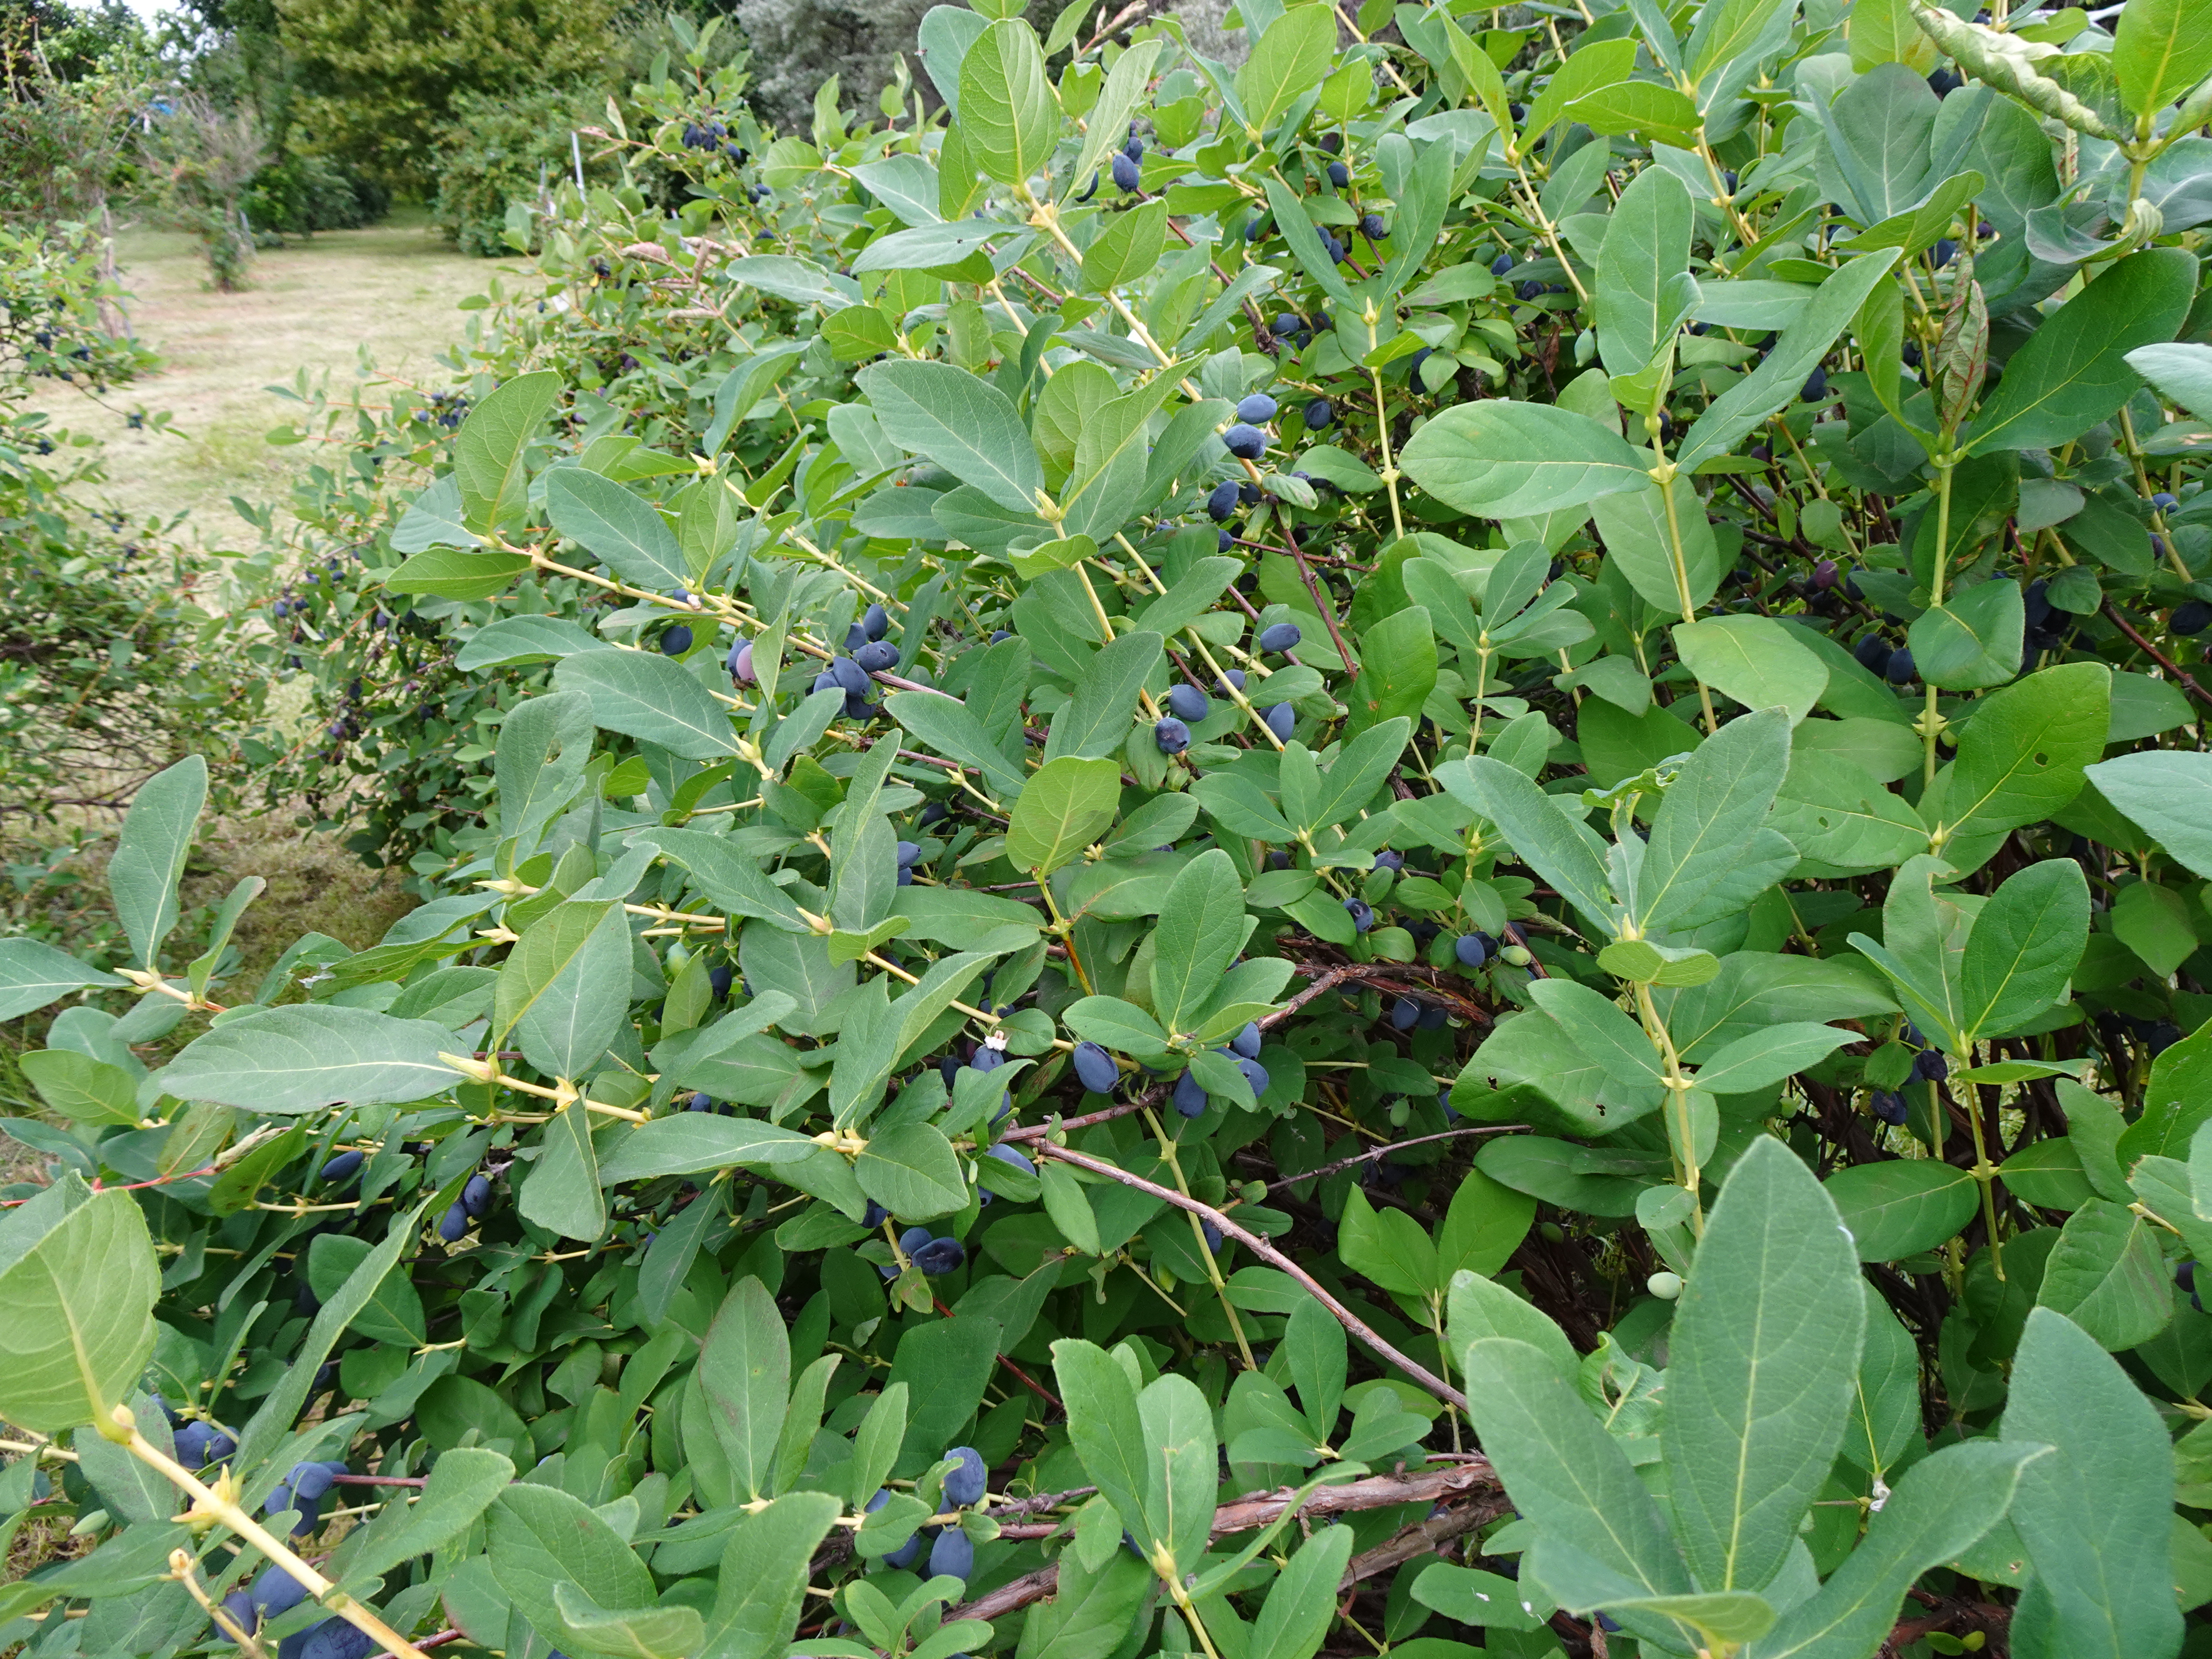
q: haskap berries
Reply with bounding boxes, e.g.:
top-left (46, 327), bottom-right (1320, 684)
top-left (1887, 648), bottom-right (1914, 685)
top-left (353, 551), bottom-right (358, 558)
top-left (1144, 565), bottom-right (1163, 583)
top-left (115, 513), bottom-right (124, 522)
top-left (2067, 634), bottom-right (2097, 652)
top-left (1940, 73), bottom-right (1967, 98)
top-left (315, 792), bottom-right (322, 801)
top-left (128, 549), bottom-right (135, 557)
top-left (1359, 209), bottom-right (1389, 239)
top-left (1815, 558), bottom-right (1839, 588)
top-left (1783, 555), bottom-right (1787, 565)
top-left (2134, 1021), bottom-right (2157, 1042)
top-left (2175, 1259), bottom-right (2195, 1292)
top-left (1533, 140), bottom-right (1545, 151)
top-left (1845, 565), bottom-right (1868, 601)
top-left (1265, 495), bottom-right (1279, 506)
top-left (1804, 576), bottom-right (1819, 594)
top-left (1767, 438), bottom-right (1786, 458)
top-left (1756, 331), bottom-right (1775, 351)
top-left (948, 788), bottom-right (966, 800)
top-left (1312, 311), bottom-right (1330, 333)
top-left (98, 384), bottom-right (106, 393)
top-left (1871, 1089), bottom-right (1908, 1124)
top-left (2069, 836), bottom-right (2090, 855)
top-left (1775, 548), bottom-right (1785, 554)
top-left (1441, 1088), bottom-right (1460, 1120)
top-left (1360, 451), bottom-right (1370, 460)
top-left (388, 1209), bottom-right (408, 1235)
top-left (1976, 222), bottom-right (1994, 239)
top-left (333, 573), bottom-right (342, 580)
top-left (852, 641), bottom-right (900, 671)
top-left (1422, 1003), bottom-right (1449, 1029)
top-left (1192, 1350), bottom-right (1207, 1371)
top-left (172, 1429), bottom-right (202, 1470)
top-left (756, 183), bottom-right (771, 195)
top-left (1272, 338), bottom-right (1296, 356)
top-left (420, 662), bottom-right (426, 668)
top-left (1918, 235), bottom-right (1956, 271)
top-left (455, 400), bottom-right (465, 407)
top-left (347, 723), bottom-right (359, 736)
top-left (690, 126), bottom-right (702, 145)
top-left (1291, 471), bottom-right (1310, 479)
top-left (864, 604), bottom-right (888, 642)
top-left (1113, 1075), bottom-right (1139, 1101)
top-left (1402, 917), bottom-right (1441, 953)
top-left (1235, 1021), bottom-right (1261, 1059)
top-left (1303, 396), bottom-right (1336, 428)
top-left (1073, 1040), bottom-right (1120, 1091)
top-left (914, 1233), bottom-right (966, 1275)
top-left (838, 1623), bottom-right (848, 1635)
top-left (973, 208), bottom-right (984, 218)
top-left (1245, 218), bottom-right (1267, 241)
top-left (966, 1040), bottom-right (975, 1058)
top-left (2150, 533), bottom-right (2165, 558)
top-left (987, 1144), bottom-right (1037, 1176)
top-left (1751, 446), bottom-right (1767, 460)
top-left (894, 842), bottom-right (922, 868)
top-left (689, 1092), bottom-right (709, 1111)
top-left (1920, 369), bottom-right (1926, 387)
top-left (1298, 331), bottom-right (1312, 350)
top-left (858, 972), bottom-right (870, 984)
top-left (80, 347), bottom-right (90, 353)
top-left (1238, 570), bottom-right (1258, 598)
top-left (420, 416), bottom-right (427, 421)
top-left (2134, 737), bottom-right (2158, 751)
top-left (1975, 15), bottom-right (1989, 24)
top-left (1213, 1046), bottom-right (1268, 1097)
top-left (215, 1589), bottom-right (256, 1643)
top-left (401, 1142), bottom-right (421, 1156)
top-left (64, 374), bottom-right (72, 380)
top-left (1207, 481), bottom-right (1239, 520)
top-left (40, 440), bottom-right (49, 445)
top-left (539, 304), bottom-right (544, 312)
top-left (1141, 1066), bottom-right (1163, 1075)
top-left (614, 280), bottom-right (621, 289)
top-left (151, 1396), bottom-right (170, 1422)
top-left (884, 774), bottom-right (891, 785)
top-left (365, 711), bottom-right (372, 717)
top-left (1155, 523), bottom-right (1176, 533)
top-left (291, 630), bottom-right (302, 642)
top-left (1316, 566), bottom-right (1333, 591)
top-left (43, 340), bottom-right (51, 350)
top-left (70, 258), bottom-right (75, 263)
top-left (43, 448), bottom-right (49, 455)
top-left (621, 355), bottom-right (629, 362)
top-left (1421, 714), bottom-right (1434, 730)
top-left (1332, 573), bottom-right (1353, 613)
top-left (1392, 995), bottom-right (1423, 1030)
top-left (377, 612), bottom-right (388, 626)
top-left (575, 414), bottom-right (583, 423)
top-left (712, 965), bottom-right (732, 998)
top-left (2169, 594), bottom-right (2209, 638)
top-left (1538, 1222), bottom-right (1564, 1245)
top-left (1325, 160), bottom-right (1353, 189)
top-left (473, 1125), bottom-right (488, 1132)
top-left (949, 804), bottom-right (963, 823)
top-left (1532, 309), bottom-right (1552, 326)
top-left (943, 1058), bottom-right (966, 1086)
top-left (2149, 1026), bottom-right (2178, 1054)
top-left (1647, 1272), bottom-right (1682, 1299)
top-left (312, 1364), bottom-right (332, 1387)
top-left (861, 1198), bottom-right (889, 1233)
top-left (1390, 1096), bottom-right (1409, 1127)
top-left (289, 1464), bottom-right (331, 1497)
top-left (983, 975), bottom-right (994, 992)
top-left (1855, 632), bottom-right (1880, 663)
top-left (2021, 580), bottom-right (2049, 628)
top-left (1270, 850), bottom-right (1292, 869)
top-left (399, 1221), bottom-right (426, 1259)
top-left (868, 352), bottom-right (886, 361)
top-left (301, 1286), bottom-right (319, 1311)
top-left (971, 1045), bottom-right (1003, 1069)
top-left (32, 569), bottom-right (39, 576)
top-left (8, 301), bottom-right (18, 306)
top-left (137, 421), bottom-right (143, 430)
top-left (583, 608), bottom-right (590, 612)
top-left (737, 641), bottom-right (757, 683)
top-left (974, 1186), bottom-right (994, 1208)
top-left (45, 324), bottom-right (59, 335)
top-left (725, 142), bottom-right (740, 156)
top-left (1268, 216), bottom-right (1282, 236)
top-left (1499, 921), bottom-right (1530, 945)
top-left (743, 980), bottom-right (752, 996)
top-left (683, 133), bottom-right (691, 148)
top-left (113, 526), bottom-right (117, 534)
top-left (612, 373), bottom-right (619, 378)
top-left (1260, 623), bottom-right (1300, 650)
top-left (611, 606), bottom-right (617, 611)
top-left (1239, 483), bottom-right (1262, 506)
top-left (931, 1526), bottom-right (973, 1580)
top-left (1202, 1220), bottom-right (1223, 1251)
top-left (277, 610), bottom-right (286, 617)
top-left (1345, 897), bottom-right (1374, 932)
top-left (1549, 284), bottom-right (1566, 296)
top-left (715, 126), bottom-right (724, 136)
top-left (549, 1650), bottom-right (569, 1659)
top-left (654, 1006), bottom-right (663, 1021)
top-left (1917, 1048), bottom-right (1947, 1082)
top-left (1361, 1159), bottom-right (1378, 1186)
top-left (334, 752), bottom-right (342, 764)
top-left (25, 351), bottom-right (31, 360)
top-left (325, 1461), bottom-right (352, 1484)
top-left (1023, 736), bottom-right (1041, 749)
top-left (439, 415), bottom-right (449, 425)
top-left (748, 191), bottom-right (760, 204)
top-left (464, 1176), bottom-right (493, 1214)
top-left (923, 1494), bottom-right (954, 1536)
top-left (277, 1620), bottom-right (323, 1658)
top-left (440, 1203), bottom-right (466, 1241)
top-left (950, 1653), bottom-right (971, 1659)
top-left (1235, 390), bottom-right (1281, 422)
top-left (1522, 278), bottom-right (1547, 299)
top-left (2098, 1013), bottom-right (2126, 1033)
top-left (1499, 945), bottom-right (1531, 966)
top-left (1113, 155), bottom-right (1139, 192)
top-left (1335, 487), bottom-right (1349, 495)
top-left (863, 1490), bottom-right (891, 1513)
top-left (1510, 105), bottom-right (1525, 120)
top-left (265, 1485), bottom-right (290, 1516)
top-left (1312, 223), bottom-right (1332, 253)
top-left (1128, 122), bottom-right (1137, 137)
top-left (1409, 371), bottom-right (1427, 394)
top-left (2042, 612), bottom-right (2070, 631)
top-left (434, 396), bottom-right (443, 400)
top-left (679, 351), bottom-right (686, 361)
top-left (48, 301), bottom-right (62, 312)
top-left (1315, 1220), bottom-right (1335, 1238)
top-left (645, 1224), bottom-right (666, 1244)
top-left (209, 1426), bottom-right (236, 1466)
top-left (1548, 563), bottom-right (1562, 582)
top-left (717, 1102), bottom-right (733, 1116)
top-left (1134, 156), bottom-right (1143, 167)
top-left (1173, 1071), bottom-right (1207, 1117)
top-left (597, 266), bottom-right (610, 276)
top-left (1917, 351), bottom-right (1922, 367)
top-left (1869, 648), bottom-right (1894, 678)
top-left (898, 866), bottom-right (912, 888)
top-left (306, 795), bottom-right (312, 803)
top-left (1510, 290), bottom-right (1525, 315)
top-left (2001, 517), bottom-right (2019, 552)
top-left (1150, 1253), bottom-right (1167, 1291)
top-left (882, 1534), bottom-right (921, 1568)
top-left (1900, 1064), bottom-right (1918, 1085)
top-left (319, 750), bottom-right (326, 756)
top-left (992, 629), bottom-right (1011, 646)
top-left (1410, 414), bottom-right (1428, 435)
top-left (835, 697), bottom-right (846, 716)
top-left (1883, 610), bottom-right (1905, 627)
top-left (1810, 592), bottom-right (1839, 609)
top-left (1722, 571), bottom-right (1752, 583)
top-left (877, 1256), bottom-right (905, 1280)
top-left (1370, 845), bottom-right (1405, 871)
top-left (667, 942), bottom-right (691, 978)
top-left (1510, 354), bottom-right (1531, 373)
top-left (846, 696), bottom-right (878, 719)
top-left (55, 298), bottom-right (66, 306)
top-left (114, 574), bottom-right (118, 580)
top-left (2029, 630), bottom-right (2060, 647)
top-left (1356, 539), bottom-right (1377, 560)
top-left (990, 1090), bottom-right (1011, 1126)
top-left (69, 1508), bottom-right (108, 1536)
top-left (46, 370), bottom-right (51, 378)
top-left (1255, 1355), bottom-right (1268, 1362)
top-left (307, 1218), bottom-right (347, 1242)
top-left (35, 333), bottom-right (52, 341)
top-left (1940, 729), bottom-right (1957, 746)
top-left (1157, 1263), bottom-right (1177, 1293)
top-left (36, 371), bottom-right (41, 375)
top-left (2021, 632), bottom-right (2035, 672)
top-left (1646, 413), bottom-right (1675, 448)
top-left (1773, 558), bottom-right (1783, 569)
top-left (1692, 322), bottom-right (1711, 335)
top-left (328, 723), bottom-right (345, 739)
top-left (1903, 344), bottom-right (1919, 366)
top-left (813, 671), bottom-right (839, 692)
top-left (626, 426), bottom-right (638, 434)
top-left (1595, 1612), bottom-right (1620, 1631)
top-left (625, 359), bottom-right (634, 368)
top-left (406, 610), bottom-right (415, 621)
top-left (72, 353), bottom-right (78, 359)
top-left (1270, 311), bottom-right (1304, 336)
top-left (1293, 526), bottom-right (1308, 546)
top-left (1215, 669), bottom-right (1245, 691)
top-left (1472, 932), bottom-right (1499, 958)
top-left (1338, 981), bottom-right (1361, 995)
top-left (1497, 1553), bottom-right (1523, 1576)
top-left (917, 802), bottom-right (948, 826)
top-left (880, 953), bottom-right (906, 967)
top-left (420, 705), bottom-right (432, 716)
top-left (1323, 544), bottom-right (1332, 556)
top-left (1574, 328), bottom-right (1595, 367)
top-left (1457, 936), bottom-right (1484, 967)
top-left (664, 356), bottom-right (669, 362)
top-left (1679, 323), bottom-right (1692, 337)
top-left (704, 128), bottom-right (716, 150)
top-left (291, 655), bottom-right (301, 668)
top-left (596, 361), bottom-right (604, 367)
top-left (900, 1224), bottom-right (936, 1257)
top-left (2152, 493), bottom-right (2178, 512)
top-left (1126, 1530), bottom-right (1147, 1560)
top-left (843, 268), bottom-right (857, 280)
top-left (981, 999), bottom-right (1016, 1018)
top-left (834, 654), bottom-right (872, 694)
top-left (662, 625), bottom-right (693, 656)
top-left (254, 1558), bottom-right (308, 1615)
top-left (1316, 132), bottom-right (1338, 160)
top-left (1492, 254), bottom-right (1512, 276)
top-left (628, 282), bottom-right (633, 288)
top-left (1727, 364), bottom-right (1744, 371)
top-left (1307, 478), bottom-right (1328, 488)
top-left (1260, 704), bottom-right (1277, 720)
top-left (1328, 238), bottom-right (1346, 265)
top-left (92, 514), bottom-right (99, 517)
top-left (1800, 365), bottom-right (1827, 403)
top-left (943, 1448), bottom-right (986, 1506)
top-left (349, 682), bottom-right (361, 700)
top-left (330, 559), bottom-right (339, 569)
top-left (2189, 1294), bottom-right (2209, 1315)
top-left (1494, 365), bottom-right (1508, 388)
top-left (1217, 529), bottom-right (1233, 554)
top-left (672, 587), bottom-right (692, 602)
top-left (275, 1250), bottom-right (290, 1272)
top-left (1713, 607), bottom-right (1725, 615)
top-left (1474, 242), bottom-right (1495, 265)
top-left (295, 599), bottom-right (305, 610)
top-left (189, 1421), bottom-right (214, 1436)
top-left (1827, 203), bottom-right (1845, 231)
top-left (1827, 226), bottom-right (1843, 249)
top-left (1342, 231), bottom-right (1352, 254)
top-left (728, 637), bottom-right (751, 678)
top-left (758, 231), bottom-right (773, 239)
top-left (304, 1614), bottom-right (372, 1658)
top-left (82, 353), bottom-right (88, 360)
top-left (1158, 846), bottom-right (1173, 852)
top-left (292, 1493), bottom-right (316, 1537)
top-left (1223, 422), bottom-right (1270, 458)
top-left (1167, 684), bottom-right (1206, 721)
top-left (632, 279), bottom-right (639, 284)
top-left (1926, 65), bottom-right (1948, 92)
top-left (1900, 1020), bottom-right (1924, 1046)
top-left (1075, 168), bottom-right (1097, 204)
top-left (1990, 571), bottom-right (2007, 580)
top-left (374, 457), bottom-right (381, 464)
top-left (1122, 137), bottom-right (1143, 163)
top-left (3, 301), bottom-right (10, 308)
top-left (843, 626), bottom-right (865, 651)
top-left (1153, 716), bottom-right (1192, 754)
top-left (307, 572), bottom-right (312, 578)
top-left (1267, 702), bottom-right (1295, 738)
top-left (1721, 171), bottom-right (1741, 194)
top-left (1427, 1504), bottom-right (1448, 1519)
top-left (192, 667), bottom-right (199, 670)
top-left (450, 415), bottom-right (458, 426)
top-left (1413, 346), bottom-right (1433, 370)
top-left (320, 1150), bottom-right (366, 1183)
top-left (135, 414), bottom-right (145, 419)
